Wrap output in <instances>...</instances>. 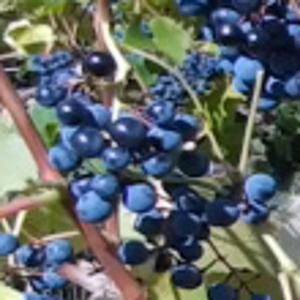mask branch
<instances>
[{"instance_id": "branch-1", "label": "branch", "mask_w": 300, "mask_h": 300, "mask_svg": "<svg viewBox=\"0 0 300 300\" xmlns=\"http://www.w3.org/2000/svg\"><path fill=\"white\" fill-rule=\"evenodd\" d=\"M0 105L4 106L5 114L18 131L21 140L30 146L36 159L39 177L62 192V203L71 213L74 228L97 254L117 292L124 300L144 298V287L129 274L124 264L115 255L117 246L120 244L121 197L119 195L114 197L113 214L103 222L102 231L96 224L82 228L75 214V205L78 201L70 195L69 185L63 174L50 168V155L41 138V133L27 109L22 105L14 83L11 78L7 77V68L3 64H0Z\"/></svg>"}, {"instance_id": "branch-2", "label": "branch", "mask_w": 300, "mask_h": 300, "mask_svg": "<svg viewBox=\"0 0 300 300\" xmlns=\"http://www.w3.org/2000/svg\"><path fill=\"white\" fill-rule=\"evenodd\" d=\"M94 3L96 4V10L94 12V22L96 27L95 49L97 51H105L107 47L103 42L100 24L105 22L109 31H114L116 29L114 10L110 0H94Z\"/></svg>"}, {"instance_id": "branch-3", "label": "branch", "mask_w": 300, "mask_h": 300, "mask_svg": "<svg viewBox=\"0 0 300 300\" xmlns=\"http://www.w3.org/2000/svg\"><path fill=\"white\" fill-rule=\"evenodd\" d=\"M116 75L109 73L100 79V97L103 104L107 107H111L114 103V81Z\"/></svg>"}]
</instances>
